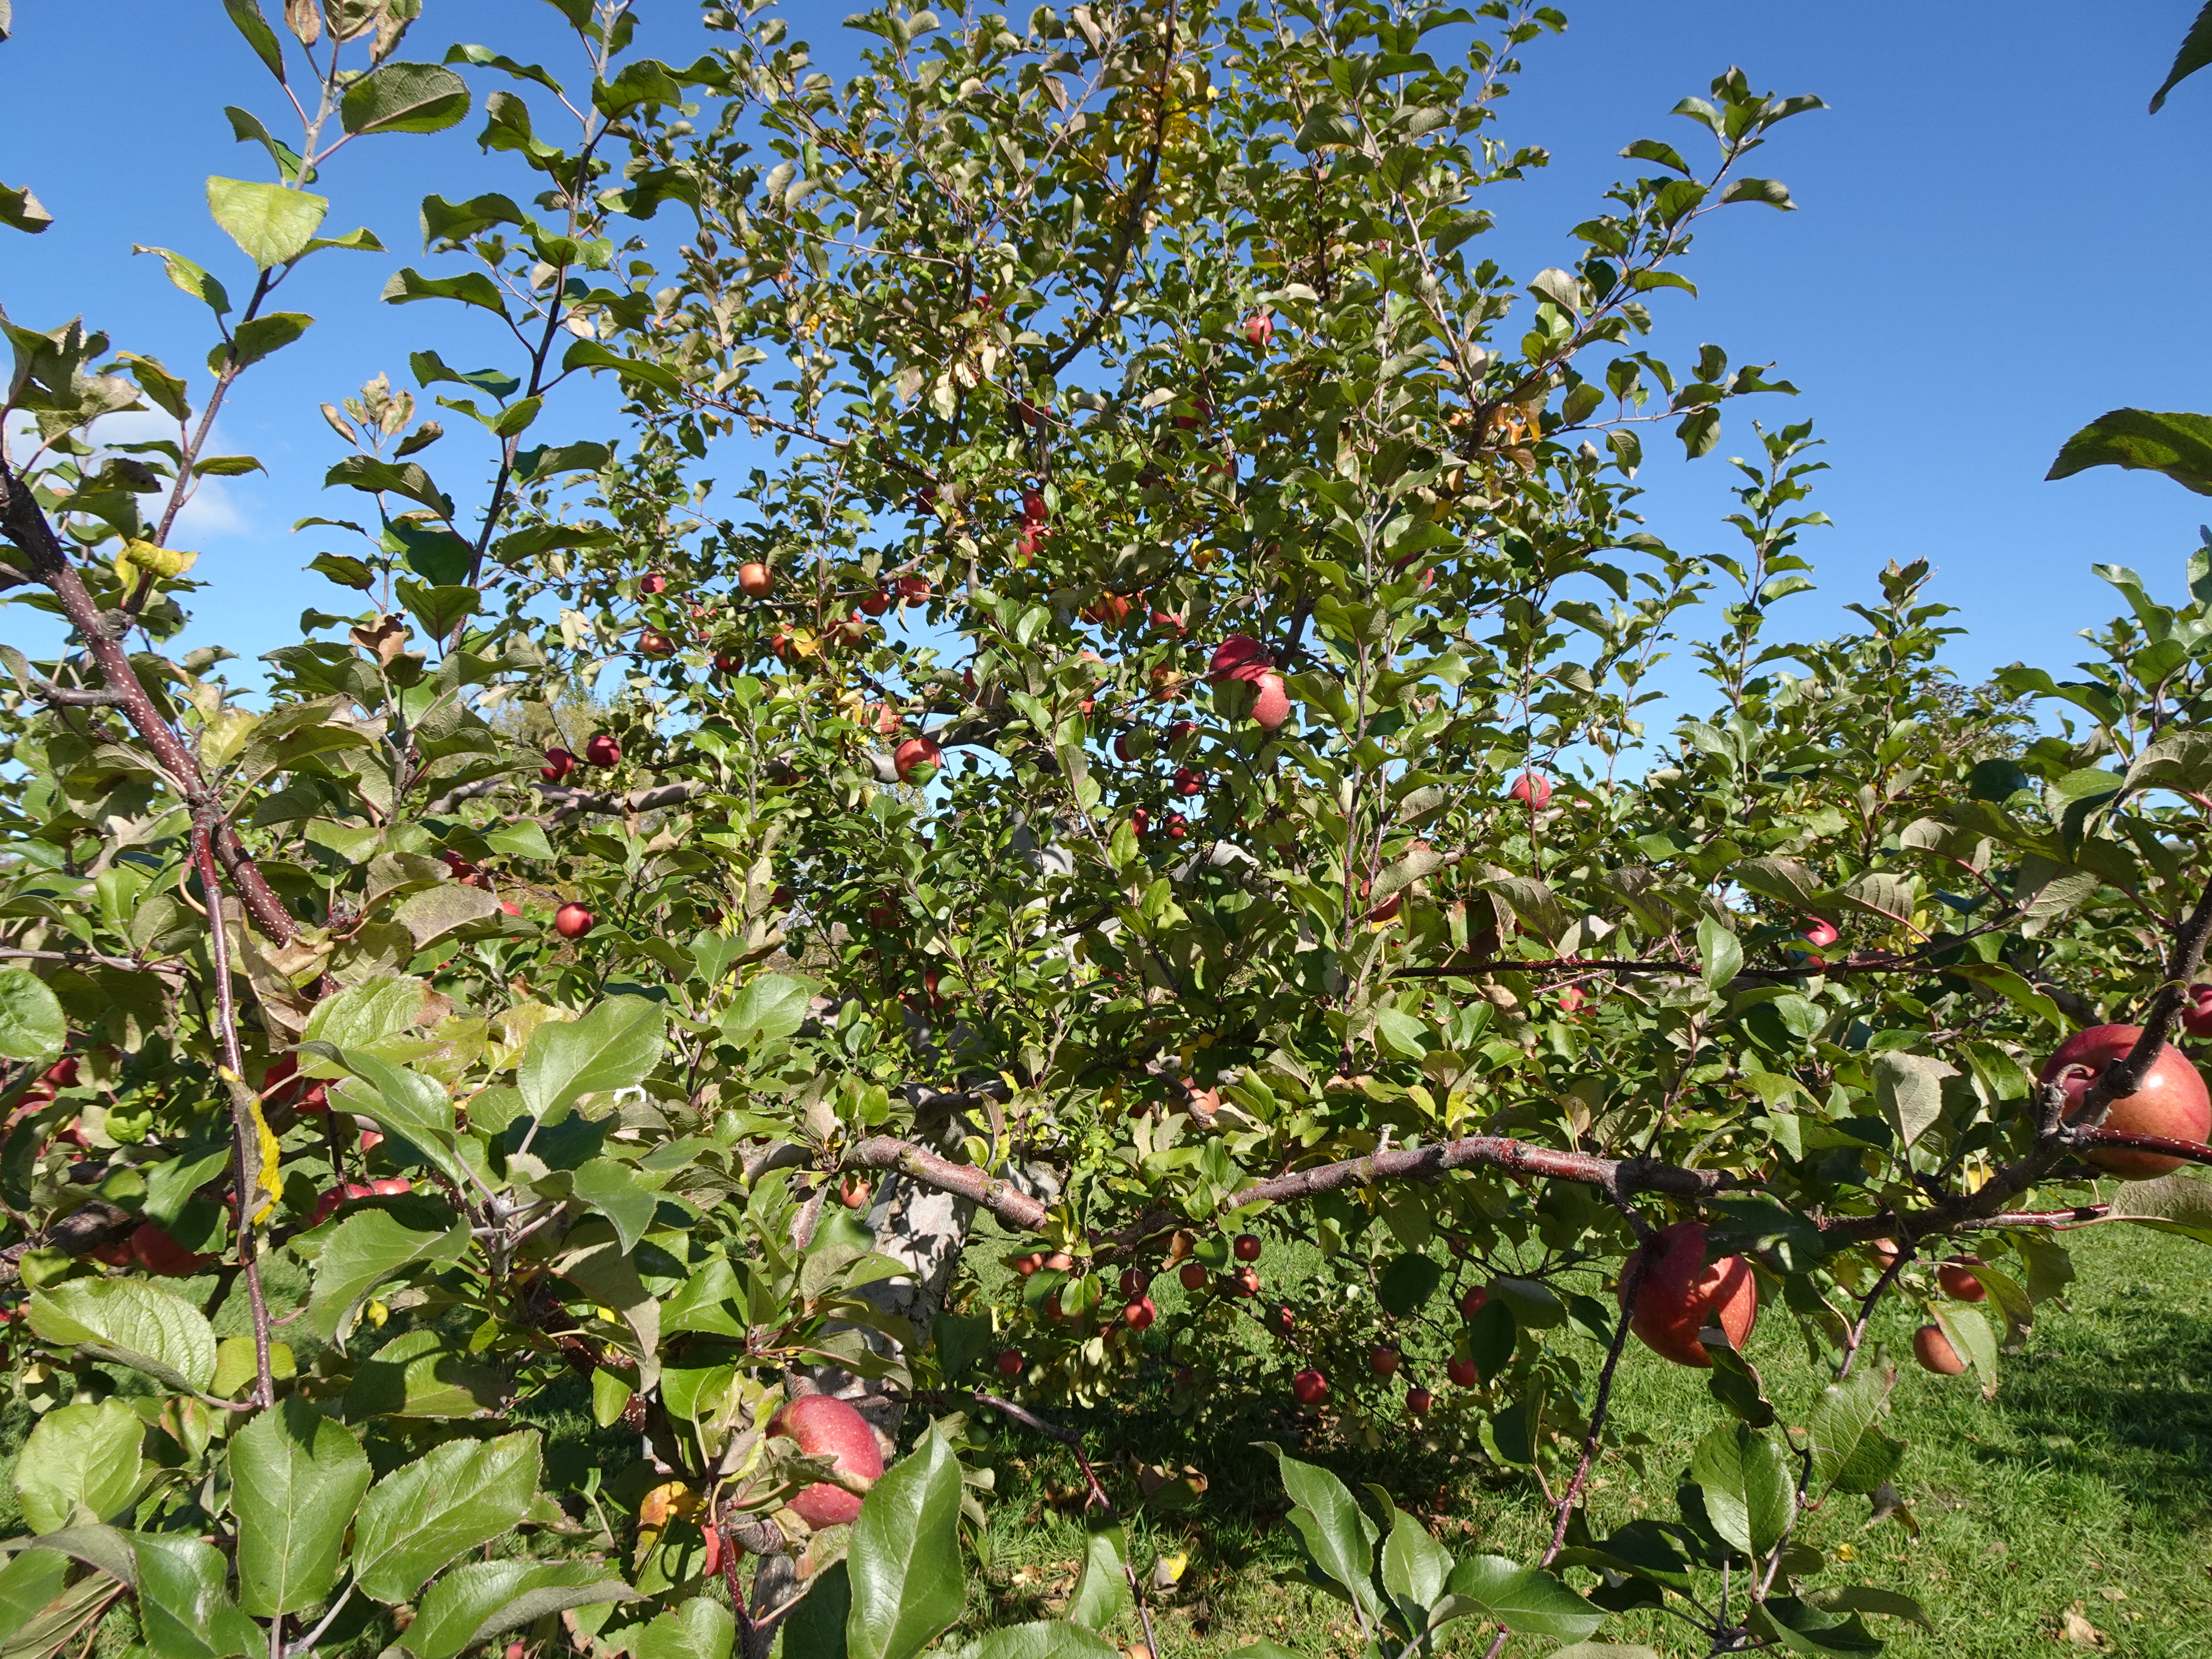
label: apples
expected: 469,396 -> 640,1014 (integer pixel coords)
541,748 -> 574,782
1045,1253 -> 1070,1272
972,294 -> 1005,322
1433,861 -> 1460,886
1134,1037 -> 1144,1042
1293,1369 -> 1327,1405
1361,881 -> 1398,922
871,908 -> 898,928
767,1395 -> 884,1529
636,571 -> 665,605
132,1222 -> 217,1276
1114,735 -> 1140,762
1265,1305 -> 1293,1338
1350,985 -> 1392,1005
701,1523 -> 745,1576
767,887 -> 793,914
1083,599 -> 1106,625
1173,767 -> 1204,797
1128,1103 -> 1150,1119
1406,1388 -> 1431,1415
705,896 -> 733,924
1018,514 -> 1043,533
924,996 -> 954,1023
898,991 -> 923,1017
425,960 -> 456,983
2037,1024 -> 2212,1180
1169,721 -> 1198,747
91,1238 -> 136,1267
1236,814 -> 1263,830
1123,1295 -> 1155,1331
263,1052 -> 340,1114
1840,799 -> 1847,807
1046,1297 -> 1064,1318
738,562 -> 774,599
1370,1348 -> 1400,1377
691,607 -> 717,640
1234,1234 -> 1261,1262
1914,1325 -> 1969,1375
1078,652 -> 1103,689
373,1177 -> 412,1196
1017,525 -> 1055,568
1938,1254 -> 1989,1302
1120,1268 -> 1149,1298
1511,773 -> 1551,812
1691,962 -> 1702,976
1230,1267 -> 1259,1298
1150,662 -> 1180,704
500,901 -> 521,942
500,902 -> 521,916
771,624 -> 814,664
860,703 -> 892,735
916,487 -> 938,515
1519,1072 -> 1545,1087
1022,488 -> 1048,520
586,735 -> 621,768
1100,1326 -> 1115,1342
894,738 -> 941,785
1274,840 -> 1298,856
1448,1223 -> 1466,1257
1078,694 -> 1095,719
840,1177 -> 870,1209
1130,809 -> 1149,838
825,611 -> 862,646
1150,610 -> 1188,639
1447,1355 -> 1477,1388
884,704 -> 903,733
306,1184 -> 374,1226
1242,314 -> 1273,348
1165,813 -> 1188,840
1462,1285 -> 1489,1319
8,1078 -> 55,1109
1019,397 -> 1051,428
43,1056 -> 82,1088
925,970 -> 938,994
1017,1253 -> 1043,1276
444,849 -> 488,889
1619,1222 -> 1758,1367
1526,1035 -> 1540,1057
1786,915 -> 1837,974
859,586 -> 891,617
52,1128 -> 90,1162
1176,399 -> 1211,430
1167,1078 -> 1219,1131
1209,634 -> 1273,689
998,1349 -> 1023,1375
1180,1263 -> 1208,1291
2183,984 -> 2212,1039
1286,814 -> 1306,831
361,1130 -> 384,1155
1205,454 -> 1234,478
1552,985 -> 1596,1024
859,949 -> 871,962
1574,790 -> 1603,829
964,364 -> 982,395
896,572 -> 930,608
1391,940 -> 1400,948
961,668 -> 981,706
778,772 -> 806,794
714,650 -> 744,675
556,902 -> 594,939
639,626 -> 674,661
1108,586 -> 1147,628
1107,976 -> 1122,1000
1229,665 -> 1292,732
939,1086 -> 952,1094
1394,553 -> 1433,591
834,592 -> 847,601
227,1193 -> 238,1232
1872,1238 -> 1898,1270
